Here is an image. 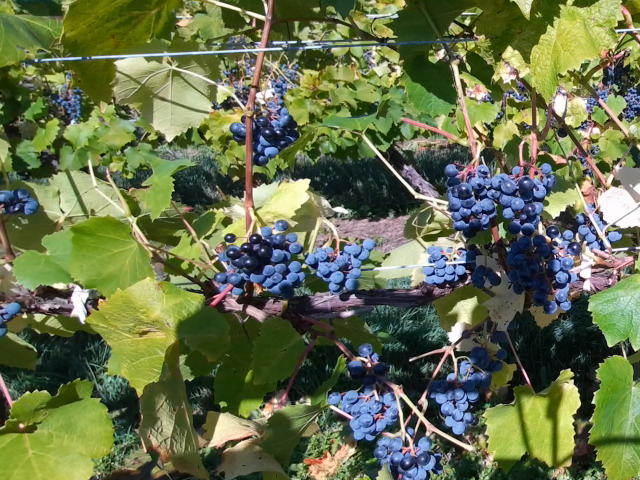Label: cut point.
<instances>
[{
    "label": "cut point",
    "mask_w": 640,
    "mask_h": 480,
    "mask_svg": "<svg viewBox=\"0 0 640 480\" xmlns=\"http://www.w3.org/2000/svg\"><path fill=\"white\" fill-rule=\"evenodd\" d=\"M394 396L396 399V408H397V413H398V425L400 428V432L403 435V437L405 438V440L410 444L413 445L414 444V440L409 436L408 432L405 429L404 423H403V410H402V406H401V396L399 394V392L397 391V388L394 389Z\"/></svg>",
    "instance_id": "1"
},
{
    "label": "cut point",
    "mask_w": 640,
    "mask_h": 480,
    "mask_svg": "<svg viewBox=\"0 0 640 480\" xmlns=\"http://www.w3.org/2000/svg\"><path fill=\"white\" fill-rule=\"evenodd\" d=\"M532 140H533V135H529L527 137H523V138L520 139V141L517 144V155L519 157L523 156V152H522L523 144L526 143V142H530Z\"/></svg>",
    "instance_id": "2"
},
{
    "label": "cut point",
    "mask_w": 640,
    "mask_h": 480,
    "mask_svg": "<svg viewBox=\"0 0 640 480\" xmlns=\"http://www.w3.org/2000/svg\"><path fill=\"white\" fill-rule=\"evenodd\" d=\"M248 212L251 216L252 222L250 224V228H254L255 223L256 224H260V220L258 218V216H256L255 210L253 208V206H248Z\"/></svg>",
    "instance_id": "3"
},
{
    "label": "cut point",
    "mask_w": 640,
    "mask_h": 480,
    "mask_svg": "<svg viewBox=\"0 0 640 480\" xmlns=\"http://www.w3.org/2000/svg\"><path fill=\"white\" fill-rule=\"evenodd\" d=\"M472 143L477 144V148L475 150L474 157H473V160L477 161L479 159L480 152L482 150V142L478 138H474L472 140Z\"/></svg>",
    "instance_id": "4"
},
{
    "label": "cut point",
    "mask_w": 640,
    "mask_h": 480,
    "mask_svg": "<svg viewBox=\"0 0 640 480\" xmlns=\"http://www.w3.org/2000/svg\"><path fill=\"white\" fill-rule=\"evenodd\" d=\"M450 356H451V358H452V365H453V366H457V365H458V362H459L460 360H463V359H464V356H463V355H456V353H455V351H454V350H452V353L450 354Z\"/></svg>",
    "instance_id": "5"
}]
</instances>
